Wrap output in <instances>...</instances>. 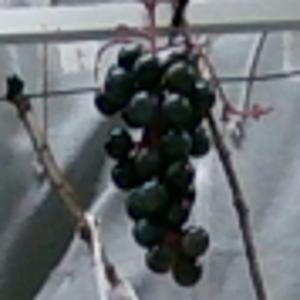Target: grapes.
Returning a JSON list of instances; mask_svg holds the SVG:
<instances>
[{
    "label": "grapes",
    "instance_id": "grapes-1",
    "mask_svg": "<svg viewBox=\"0 0 300 300\" xmlns=\"http://www.w3.org/2000/svg\"><path fill=\"white\" fill-rule=\"evenodd\" d=\"M201 69L195 53L169 50L158 59L141 43H127L93 98L102 118L120 113L125 127L142 130L138 142L124 128L107 131L102 149L116 162L109 178L129 194L123 210L135 223L134 242L146 249L145 267L157 276L170 273L181 288L198 284L203 275L198 259L211 243L204 227L183 229L196 199L197 172L189 158H205L212 149L201 124L217 95Z\"/></svg>",
    "mask_w": 300,
    "mask_h": 300
}]
</instances>
